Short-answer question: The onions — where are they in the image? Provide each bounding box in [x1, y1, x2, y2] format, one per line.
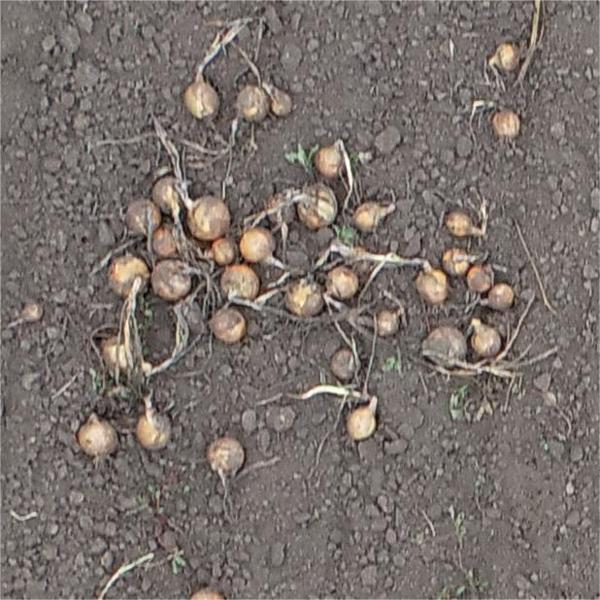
[422, 323, 463, 367]
[311, 143, 342, 175]
[203, 438, 242, 473]
[107, 254, 147, 291]
[295, 186, 335, 226]
[132, 412, 169, 448]
[351, 199, 384, 231]
[486, 281, 513, 307]
[284, 277, 322, 315]
[209, 306, 245, 342]
[75, 418, 115, 456]
[465, 265, 492, 291]
[266, 192, 293, 223]
[490, 108, 520, 137]
[489, 41, 518, 70]
[220, 262, 258, 299]
[181, 81, 218, 118]
[152, 261, 193, 302]
[328, 347, 356, 378]
[188, 583, 226, 599]
[439, 247, 473, 275]
[344, 401, 376, 437]
[267, 85, 291, 114]
[151, 176, 188, 218]
[100, 336, 138, 372]
[234, 86, 268, 121]
[239, 226, 273, 261]
[415, 269, 447, 302]
[123, 199, 159, 234]
[326, 267, 357, 298]
[23, 298, 43, 321]
[186, 196, 229, 238]
[211, 236, 237, 263]
[466, 321, 498, 356]
[372, 303, 401, 333]
[148, 226, 177, 257]
[443, 207, 473, 235]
